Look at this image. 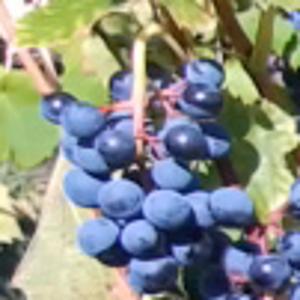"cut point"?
<instances>
[{"label": "cut point", "mask_w": 300, "mask_h": 300, "mask_svg": "<svg viewBox=\"0 0 300 300\" xmlns=\"http://www.w3.org/2000/svg\"><path fill=\"white\" fill-rule=\"evenodd\" d=\"M150 38L151 32L149 29H140L134 37L130 50L133 75L131 112L135 116L142 115L145 108V86L149 64L145 47Z\"/></svg>", "instance_id": "1"}]
</instances>
